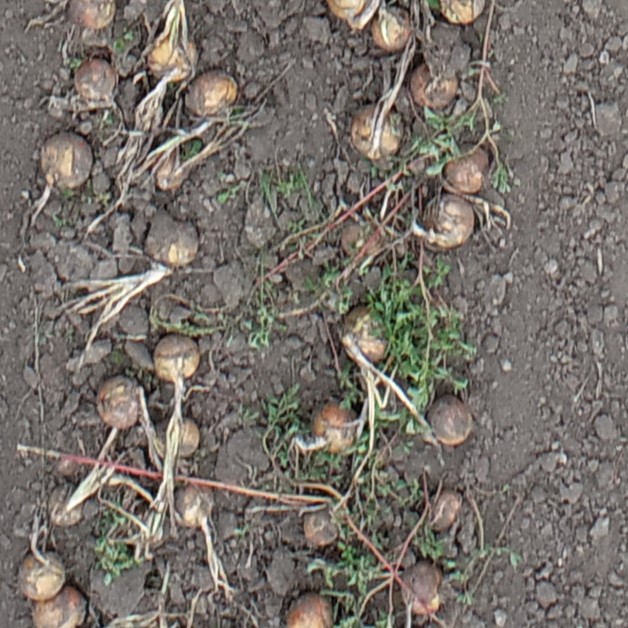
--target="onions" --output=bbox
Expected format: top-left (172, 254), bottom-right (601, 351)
top-left (71, 61), bottom-right (116, 106)
top-left (149, 217), bottom-right (197, 268)
top-left (174, 488), bottom-right (208, 525)
top-left (161, 420), bottom-right (201, 455)
top-left (32, 135), bottom-right (92, 189)
top-left (327, 0), bottom-right (373, 27)
top-left (17, 552), bottom-right (63, 599)
top-left (344, 221), bottom-right (386, 263)
top-left (438, 0), bottom-right (482, 24)
top-left (426, 493), bottom-right (461, 531)
top-left (341, 307), bottom-right (388, 363)
top-left (58, 456), bottom-right (75, 474)
top-left (30, 585), bottom-right (85, 626)
top-left (156, 155), bottom-right (188, 191)
top-left (301, 506), bottom-right (337, 546)
top-left (67, 0), bottom-right (115, 35)
top-left (150, 337), bottom-right (199, 380)
top-left (348, 107), bottom-right (401, 159)
top-left (93, 378), bottom-right (141, 429)
top-left (186, 71), bottom-right (237, 117)
top-left (426, 398), bottom-right (471, 445)
top-left (48, 483), bottom-right (84, 525)
top-left (421, 195), bottom-right (473, 248)
top-left (284, 593), bottom-right (333, 626)
top-left (322, 422), bottom-right (353, 453)
top-left (370, 14), bottom-right (407, 49)
top-left (443, 144), bottom-right (487, 190)
top-left (312, 402), bottom-right (358, 447)
top-left (154, 45), bottom-right (192, 81)
top-left (402, 561), bottom-right (441, 611)
top-left (417, 70), bottom-right (459, 112)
